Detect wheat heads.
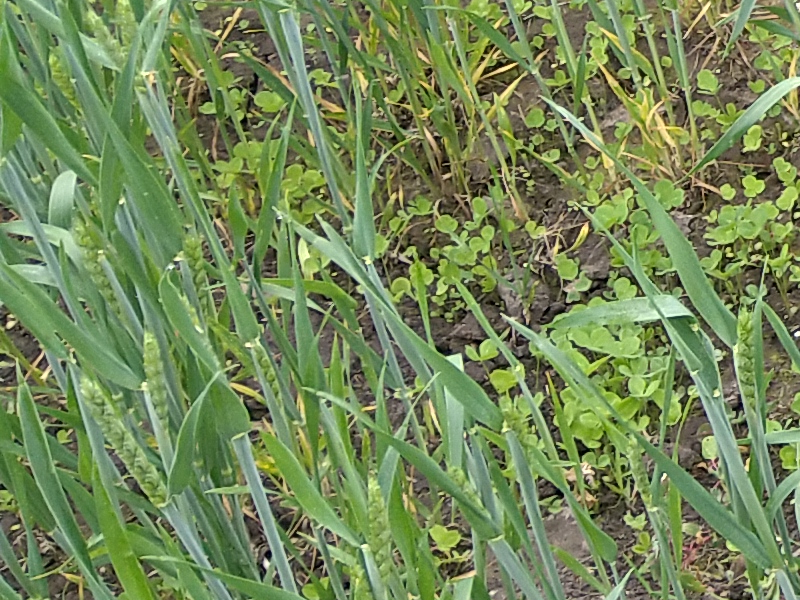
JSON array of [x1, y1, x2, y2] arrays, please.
[[182, 237, 207, 319], [49, 50, 82, 107], [70, 218, 117, 321], [626, 439, 651, 499], [140, 328, 167, 424], [361, 474, 394, 591], [118, 0, 141, 53], [354, 576, 389, 600], [252, 341, 275, 396], [82, 376, 160, 502], [90, 9, 125, 69], [450, 464, 488, 518], [735, 309, 760, 419]]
